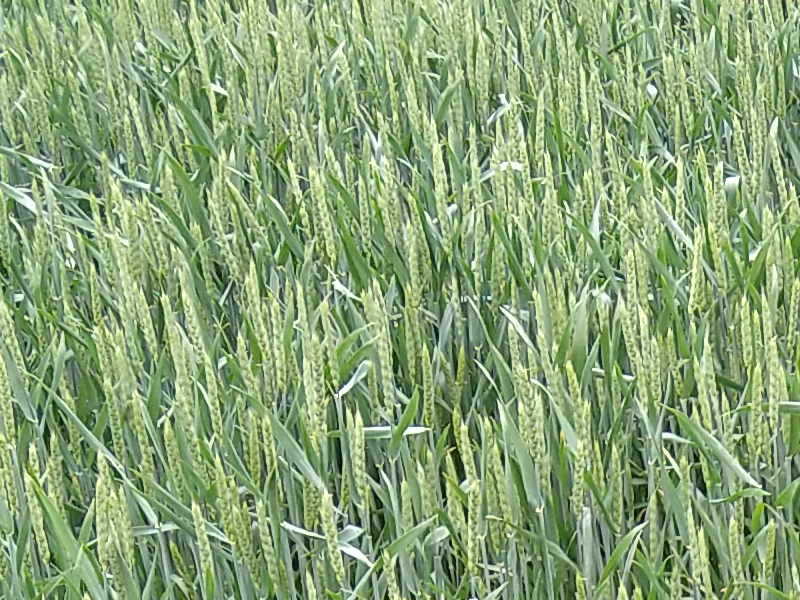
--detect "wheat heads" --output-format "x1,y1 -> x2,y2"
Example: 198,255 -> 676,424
737,3 -> 747,64
596,289 -> 607,333
764,3 -> 781,64
0,186 -> 11,268
354,401 -> 366,500
311,334 -> 327,431
603,580 -> 611,600
435,186 -> 452,260
226,178 -> 271,258
22,470 -> 51,564
140,2 -> 164,82
708,220 -> 726,292
122,114 -> 139,180
342,459 -> 350,507
213,14 -> 235,83
287,347 -> 298,382
246,98 -> 255,121
638,302 -> 650,382
413,0 -> 420,57
405,218 -> 416,259
71,107 -> 80,138
761,291 -> 773,373
245,273 -> 270,362
121,2 -> 136,47
234,393 -> 253,469
507,42 -> 516,100
449,126 -> 456,150
491,146 -> 507,216
68,70 -> 96,173
467,482 -> 481,570
348,44 -> 355,77
258,2 -> 273,81
301,357 -> 314,419
654,0 -> 661,21
675,103 -> 679,156
195,294 -> 210,328
159,174 -> 171,205
171,244 -> 179,267
74,0 -> 93,42
630,205 -> 647,242
613,82 -> 622,136
422,102 -> 428,143
763,421 -> 771,470
532,0 -> 539,32
474,42 -> 482,91
0,152 -> 10,184
765,519 -> 775,581
574,573 -> 588,600
787,0 -> 800,52
633,587 -> 644,600
788,280 -> 799,350
452,278 -> 463,335
163,419 -> 186,501
169,108 -> 184,164
0,480 -> 8,580
335,0 -> 348,41
523,0 -> 532,42
544,148 -> 555,200
261,2 -> 275,32
407,284 -> 423,377
491,441 -> 513,532
430,119 -> 448,195
732,115 -> 754,196
278,19 -> 295,100
439,52 -> 446,67
636,350 -> 648,414
552,15 -> 565,70
28,444 -> 41,481
167,162 -> 184,218
567,30 -> 579,104
88,263 -> 103,323
699,528 -> 715,600
77,232 -> 90,272
688,506 -> 701,589
270,297 -> 287,394
466,8 -> 474,33
39,1 -> 49,28
641,159 -> 659,236
305,570 -> 326,600
595,361 -> 607,413
143,194 -> 171,274
115,327 -> 135,384
410,236 -> 420,301
776,4 -> 783,25
691,0 -> 698,21
167,539 -> 191,585
573,410 -> 585,445
52,346 -> 69,401
237,334 -> 264,412
31,178 -> 54,264
410,164 -> 421,201
461,217 -> 468,256
674,41 -> 680,93
181,289 -> 205,364
245,67 -> 255,102
455,0 -> 465,46
128,2 -> 141,43
625,0 -> 631,33
550,1 -> 566,43
208,200 -> 241,283
232,504 -> 262,587
276,46 -> 289,114
750,107 -> 762,192
36,316 -> 48,354
95,478 -> 106,567
400,481 -> 416,560
363,0 -> 373,29
178,70 -> 193,107
230,201 -> 250,259
440,353 -> 460,412
770,135 -> 787,208
763,46 -> 774,118
606,129 -> 619,173
640,194 -> 652,236
558,210 -> 564,237
395,48 -> 408,91
637,87 -> 648,139
219,147 -> 230,232
542,187 -> 551,256
238,94 -> 247,118
130,95 -> 153,164
417,460 -> 434,528
190,20 -> 213,103
681,457 -> 692,507
517,398 -> 529,446
348,21 -> 359,56
73,475 -> 82,499
58,262 -> 75,310
101,152 -> 113,201
206,3 -> 216,25
410,75 -> 418,112
50,323 -> 60,350
175,382 -> 209,489
486,470 -> 500,548
574,184 -> 584,232
714,60 -> 719,80
551,192 -> 562,240
303,477 -> 313,531
689,320 -> 698,343
654,25 -> 664,66
612,442 -> 623,529
665,53 -> 674,123
519,21 -> 537,94
664,0 -> 673,41
112,231 -> 134,322
301,23 -> 311,64
607,25 -> 614,63
448,73 -> 458,109
705,177 -> 714,224
536,87 -> 544,162
669,565 -> 681,600
721,189 -> 729,231
504,109 -> 511,132
601,193 -> 613,235
692,353 -> 712,431
775,228 -> 783,293
124,199 -> 144,276
62,45 -> 68,60
460,0 -> 467,28
93,327 -> 111,382
315,12 -> 330,70
749,362 -> 761,451
538,330 -> 557,395
625,249 -> 637,338
0,423 -> 7,510
635,239 -> 649,315
293,50 -> 304,95
630,486 -> 635,518
255,497 -> 280,586
445,456 -> 468,541
326,145 -> 352,222
346,406 -> 355,479
185,138 -> 196,171
706,280 -> 716,352
758,83 -> 767,151
457,344 -> 465,392
302,123 -> 318,170
0,352 -> 16,439
345,116 -> 356,156
292,2 -> 302,50
33,225 -> 44,255
21,544 -> 33,577
506,162 -> 516,222
23,131 -> 36,161
558,99 -> 566,132
761,206 -> 770,238
728,516 -> 743,584
784,235 -> 795,306
555,269 -> 568,339
611,367 -> 620,416
362,290 -> 368,323
688,43 -> 702,106
381,155 -> 399,231
484,0 -> 492,28
754,309 -> 764,365
195,222 -> 215,299
321,298 -> 339,391
229,479 -> 239,506
518,200 -> 532,278
206,187 -> 211,200
330,16 -> 339,44
665,326 -> 685,396
262,416 -> 285,496
779,363 -> 789,442
131,391 -> 154,478
62,300 -> 88,366
116,347 -> 131,394
329,118 -> 337,144
372,278 -> 393,367
129,78 -> 138,100
274,99 -> 282,150
301,403 -> 320,457
452,408 -> 463,452
11,22 -> 27,63
51,23 -> 61,88
754,5 -> 764,50
546,273 -> 559,341
767,212 -> 774,290
587,168 -> 594,189
214,178 -> 223,224
136,200 -> 145,220
434,147 -> 443,194
280,559 -> 289,600
118,485 -> 135,560
649,334 -> 662,411
35,15 -> 48,46
541,455 -> 551,489
357,35 -> 377,96
2,304 -> 29,390
251,261 -> 261,307
747,29 -> 751,59
460,424 -> 477,484
211,89 -> 221,137
714,163 -> 723,237
215,455 -> 237,553
513,482 -> 524,552
394,111 -> 401,137
556,366 -> 565,411
577,234 -> 584,268
366,286 -> 377,323
190,3 -> 199,22
248,2 -> 260,51
735,60 -> 743,90
89,190 -> 116,284
227,82 -> 239,142
404,311 -> 415,383
2,45 -> 18,83
108,81 -> 122,150
343,152 -> 357,205
377,194 -> 397,249
721,0 -> 728,53
103,381 -> 125,458
317,86 -> 327,134
133,280 -> 148,337
474,168 -> 486,229
34,82 -> 53,145
696,149 -> 709,183
661,51 -> 676,111
446,20 -> 458,66
532,288 -> 545,335
490,161 -> 499,209
745,71 -> 754,107
63,5 -> 71,20
619,183 -> 629,253
493,7 -> 503,69
508,324 -> 521,381
363,133 -> 370,183
475,18 -> 482,48
527,133 -> 535,157
111,43 -> 128,113
330,1 -> 337,17
510,96 -> 520,162
446,481 -> 456,525
649,493 -> 657,561
703,337 -> 718,394
368,364 -> 380,426
394,26 -> 400,46
161,292 -> 181,357
296,283 -> 313,362
251,413 -> 261,486
385,59 -> 397,113
480,35 -> 489,99
319,490 -> 347,583
413,58 -> 423,104
264,83 -> 275,157
414,97 -> 422,134
782,34 -> 788,63
290,108 -> 300,173
426,450 -> 437,492
370,0 -> 384,70
694,17 -> 709,92
225,4 -> 235,43
305,274 -> 314,317
625,43 -> 635,115
608,1 -> 615,23
142,235 -> 155,264
615,55 -> 632,111
790,184 -> 800,221
638,64 -> 646,96
421,39 -> 427,74
353,0 -> 364,38
338,49 -> 358,110
0,434 -> 19,515
239,10 -> 254,65
149,2 -> 160,31
379,326 -> 395,414
383,550 -> 398,600
733,470 -> 745,532
109,492 -> 129,559
56,1 -> 74,42
284,182 -> 292,212
49,459 -> 67,524
27,25 -> 51,94
469,123 -> 480,186
359,174 -> 374,250
329,79 -> 341,132
737,87 -> 749,140
687,227 -> 701,314
591,122 -> 603,188
0,68 -> 17,138
394,0 -> 406,29
316,177 -> 336,262
777,65 -> 786,121
465,19 -> 476,92
112,185 -> 130,234
287,159 -> 309,238
311,485 -> 320,519
174,9 -> 199,88
25,62 -> 41,122
50,433 -> 63,489
88,37 -> 106,90
768,341 -> 780,427
572,440 -> 584,514
660,186 -> 672,219
612,170 -> 620,216
589,0 -> 601,42
407,192 -> 432,278
582,0 -> 593,41
594,441 -> 606,494
145,92 -> 160,142
519,140 -> 535,215
618,305 -> 638,374
638,0 -> 647,42
276,0 -> 284,14
54,210 -> 71,259
23,84 -> 34,115
584,397 -> 591,444
52,123 -> 59,169
484,418 -> 494,468
69,43 -> 76,58
693,405 -> 712,486
435,1 -> 448,54
94,450 -> 112,495
255,40 -> 266,107
119,299 -> 141,367
407,85 -> 416,129
421,342 -> 435,428
454,218 -> 458,233
0,262 -> 10,349
657,328 -> 667,380
165,3 -> 175,36
455,67 -> 464,134
588,73 -> 601,135
277,7 -> 290,34
317,561 -> 328,600
791,563 -> 800,600
565,79 -> 575,152
556,242 -> 576,311
536,390 -> 543,464
772,5 -> 780,30
699,268 -> 706,308
161,118 -> 171,154
250,163 -> 258,182
557,72 -> 565,103
543,69 -> 554,125
173,22 -> 190,74
376,111 -> 395,183
514,64 -> 521,97
462,182 -> 470,216
65,390 -> 82,463
493,73 -> 499,92
475,221 -> 481,291
528,347 -> 538,389
566,360 -> 583,411
675,154 -> 685,234
178,111 -> 191,136
740,293 -> 752,367
107,537 -> 128,600
545,33 -> 552,72
203,352 -> 224,447
510,279 -> 520,322
284,277 -> 293,304
723,388 -> 733,456
494,227 -> 505,291
536,43 -> 556,89
210,158 -> 218,178
380,6 -> 393,60
515,364 -> 538,459
321,3 -> 330,36
745,432 -> 754,464
425,116 -> 432,147
309,167 -> 327,261
191,503 -> 213,575
174,327 -> 194,412
141,287 -> 157,352
420,593 -> 430,600
681,65 -> 693,133
109,3 -> 133,64
581,66 -> 590,127
649,0 -> 653,11
243,503 -> 252,541
583,171 -> 594,225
